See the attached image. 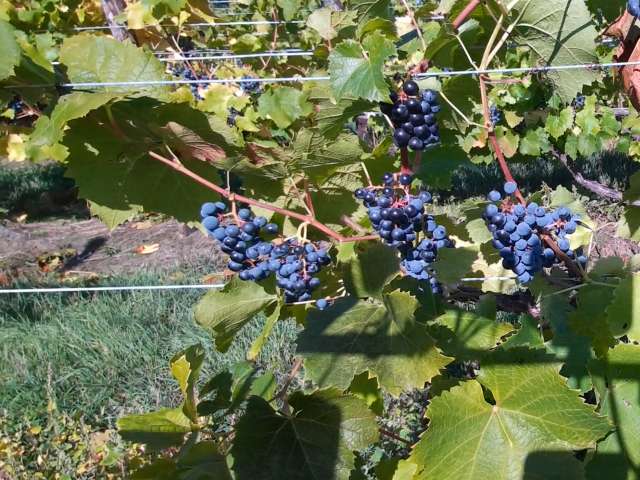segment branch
Returning a JSON list of instances; mask_svg holds the SVG:
<instances>
[{
	"mask_svg": "<svg viewBox=\"0 0 640 480\" xmlns=\"http://www.w3.org/2000/svg\"><path fill=\"white\" fill-rule=\"evenodd\" d=\"M87 118L90 119L92 122H94L96 125L101 126L103 128H106L113 135H116L118 137H121L124 140H127V141L133 143V145L137 149L142 151L143 153H145L147 155H150L151 157L156 158L157 160L169 165L173 169L177 170L178 172H180V173H182V174H184L186 176H191L192 178L198 180L199 182L203 183L204 185H207L209 188H212V189L218 191L221 195H224L225 197H227L229 199L238 200V201H241L243 203H251V204L256 205L257 207H260L262 209L270 210L272 212H276V213H279V214L292 216V217H295V218H300V219H302L304 221H307V222L315 225L320 230H322L325 234H327L333 240H336V241H341V242H361V241H367V240L378 239L379 238L378 234H369V235L359 236V237L338 236V235L334 234L331 230H329L326 226L322 225L319 221H317V220H315V219H313L310 216H307L305 214L298 213V212H295V211L281 209V208H278V207H274L272 205H268V204L262 203V202H260L258 200H255L253 198H246V197H243V196H240V195L232 194V193L222 189L217 184L212 183L210 180H207V179L201 177L199 174H196L195 172H190L187 169L182 168L180 165L172 162L170 159L160 155L159 153L154 152L152 150H149L145 146L141 145L135 138H133V137L127 135V134H124L123 132H120L119 130H116L109 123H106L104 121L99 120L97 117L93 116L91 113L87 114Z\"/></svg>",
	"mask_w": 640,
	"mask_h": 480,
	"instance_id": "obj_1",
	"label": "branch"
},
{
	"mask_svg": "<svg viewBox=\"0 0 640 480\" xmlns=\"http://www.w3.org/2000/svg\"><path fill=\"white\" fill-rule=\"evenodd\" d=\"M478 83H479V87L482 93V102H483V120H484V124H485V128H486V132L487 135L490 136L492 145L495 149V152L499 158V164L501 166V168L504 171V175L505 178L508 182L512 181V177L510 175L508 166L506 165L505 161H504V155L502 153V151L500 150V147L497 143V139L495 136V133L491 130V126H490V122H489V117H488V96H487V91L484 85V80H483V75L478 76Z\"/></svg>",
	"mask_w": 640,
	"mask_h": 480,
	"instance_id": "obj_2",
	"label": "branch"
},
{
	"mask_svg": "<svg viewBox=\"0 0 640 480\" xmlns=\"http://www.w3.org/2000/svg\"><path fill=\"white\" fill-rule=\"evenodd\" d=\"M503 26V18L501 14H498L495 20V26L493 30L490 32V35L487 38V42L485 43L484 51L482 53V60L480 61L478 70L482 71L485 67V63L490 57V54L494 48L495 43L499 37V28Z\"/></svg>",
	"mask_w": 640,
	"mask_h": 480,
	"instance_id": "obj_3",
	"label": "branch"
},
{
	"mask_svg": "<svg viewBox=\"0 0 640 480\" xmlns=\"http://www.w3.org/2000/svg\"><path fill=\"white\" fill-rule=\"evenodd\" d=\"M539 234L540 236L546 241L548 242L555 250L556 252L559 254V256L561 257L562 260L565 261V263L570 267V269L577 275L580 276L581 272L576 268V266L574 265V263L565 255V253L563 252V250L561 249V247L554 241L552 240L545 232L543 229L539 230Z\"/></svg>",
	"mask_w": 640,
	"mask_h": 480,
	"instance_id": "obj_4",
	"label": "branch"
},
{
	"mask_svg": "<svg viewBox=\"0 0 640 480\" xmlns=\"http://www.w3.org/2000/svg\"><path fill=\"white\" fill-rule=\"evenodd\" d=\"M478 4H479L478 0H474L472 3H470L466 9H464L460 14L456 16V19L453 22V25L458 26L460 24L461 19L465 17L469 12H471L472 9L476 7Z\"/></svg>",
	"mask_w": 640,
	"mask_h": 480,
	"instance_id": "obj_5",
	"label": "branch"
},
{
	"mask_svg": "<svg viewBox=\"0 0 640 480\" xmlns=\"http://www.w3.org/2000/svg\"><path fill=\"white\" fill-rule=\"evenodd\" d=\"M514 194L516 196V198L518 199V201L522 204V205H526L527 201L522 197L520 191L518 188L514 189Z\"/></svg>",
	"mask_w": 640,
	"mask_h": 480,
	"instance_id": "obj_6",
	"label": "branch"
}]
</instances>
